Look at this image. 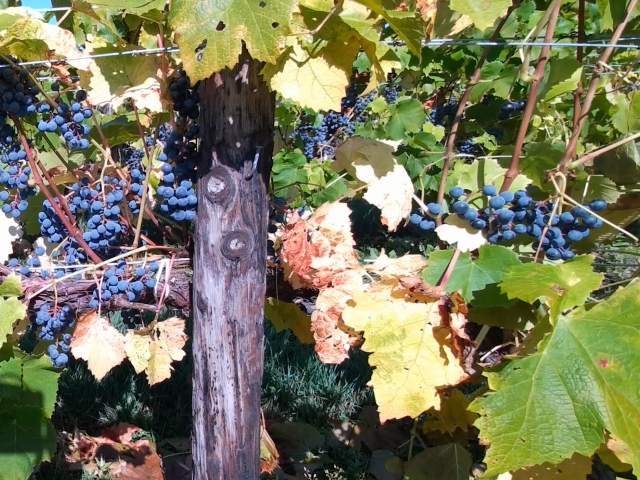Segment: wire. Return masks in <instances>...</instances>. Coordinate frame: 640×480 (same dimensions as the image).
<instances>
[{"mask_svg": "<svg viewBox=\"0 0 640 480\" xmlns=\"http://www.w3.org/2000/svg\"><path fill=\"white\" fill-rule=\"evenodd\" d=\"M177 45H157L151 47H139L134 49H126L113 53H99V54H91V55H79V56H71L64 58H46V59H34V60H24V61H16L13 63H1L0 69L4 68H16L18 66H26V65H36L42 64L46 65L48 63H66L73 61H82V60H93V59H102V58H115L128 54H136L141 52H153L160 50H177Z\"/></svg>", "mask_w": 640, "mask_h": 480, "instance_id": "2", "label": "wire"}, {"mask_svg": "<svg viewBox=\"0 0 640 480\" xmlns=\"http://www.w3.org/2000/svg\"><path fill=\"white\" fill-rule=\"evenodd\" d=\"M93 264L92 263H78V264H72V263H64L62 265H51V266H30L29 270L30 271H49V270H65L67 268L70 269H81V268H92Z\"/></svg>", "mask_w": 640, "mask_h": 480, "instance_id": "3", "label": "wire"}, {"mask_svg": "<svg viewBox=\"0 0 640 480\" xmlns=\"http://www.w3.org/2000/svg\"><path fill=\"white\" fill-rule=\"evenodd\" d=\"M479 45H488V46H497V47H539V46H550V47H562V48H570L577 49L579 47H587V48H614L618 49H640V44H620L619 42L612 43H589V42H577L575 44L572 43H564V42H552V41H536V42H517V41H509V42H499V41H491V40H477V41H425L423 43L424 47L428 46H479Z\"/></svg>", "mask_w": 640, "mask_h": 480, "instance_id": "1", "label": "wire"}]
</instances>
